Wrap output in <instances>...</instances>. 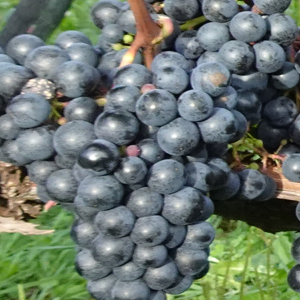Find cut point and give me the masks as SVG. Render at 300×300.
<instances>
[{
  "mask_svg": "<svg viewBox=\"0 0 300 300\" xmlns=\"http://www.w3.org/2000/svg\"><path fill=\"white\" fill-rule=\"evenodd\" d=\"M157 24L161 26L160 33L157 35V38L150 42L152 47H155L163 39L167 38L173 33V22L169 16L157 15Z\"/></svg>",
  "mask_w": 300,
  "mask_h": 300,
  "instance_id": "cut-point-1",
  "label": "cut point"
},
{
  "mask_svg": "<svg viewBox=\"0 0 300 300\" xmlns=\"http://www.w3.org/2000/svg\"><path fill=\"white\" fill-rule=\"evenodd\" d=\"M140 42L137 41V39L132 40L126 55L124 58L121 59V61H118L117 67H121V65H130L134 62V56L137 54V51L139 49Z\"/></svg>",
  "mask_w": 300,
  "mask_h": 300,
  "instance_id": "cut-point-2",
  "label": "cut point"
}]
</instances>
